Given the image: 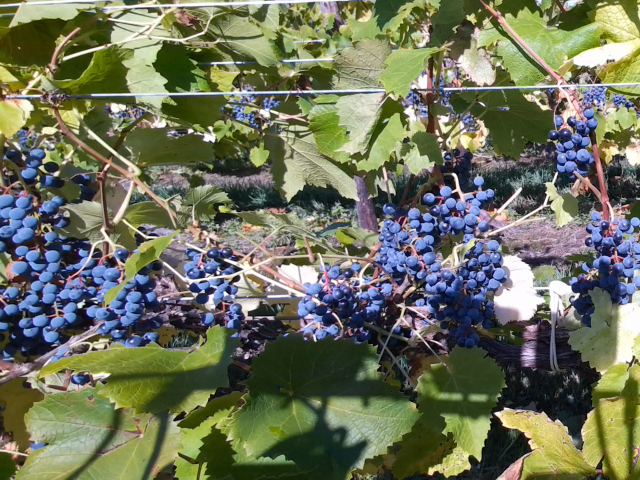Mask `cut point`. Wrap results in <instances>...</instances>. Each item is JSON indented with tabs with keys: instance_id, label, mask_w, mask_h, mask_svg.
<instances>
[{
	"instance_id": "6a23745f",
	"label": "cut point",
	"mask_w": 640,
	"mask_h": 480,
	"mask_svg": "<svg viewBox=\"0 0 640 480\" xmlns=\"http://www.w3.org/2000/svg\"><path fill=\"white\" fill-rule=\"evenodd\" d=\"M106 229H104L103 227H101L99 229V233L104 237V239H99L98 241L94 242L91 246H90V251H89V256H92L94 253V250L100 246L101 244L107 243L109 244L111 249L115 248V244L114 241L111 239V237L105 232Z\"/></svg>"
},
{
	"instance_id": "7d7e1d6f",
	"label": "cut point",
	"mask_w": 640,
	"mask_h": 480,
	"mask_svg": "<svg viewBox=\"0 0 640 480\" xmlns=\"http://www.w3.org/2000/svg\"><path fill=\"white\" fill-rule=\"evenodd\" d=\"M556 85H557V89H558V91H559L563 96H565V97H566L567 105H568L569 107H572V106H573V102H572V99H571V95H570L567 91H565V90H564V88L562 87V83H560V82H558V81H557V82H556Z\"/></svg>"
}]
</instances>
